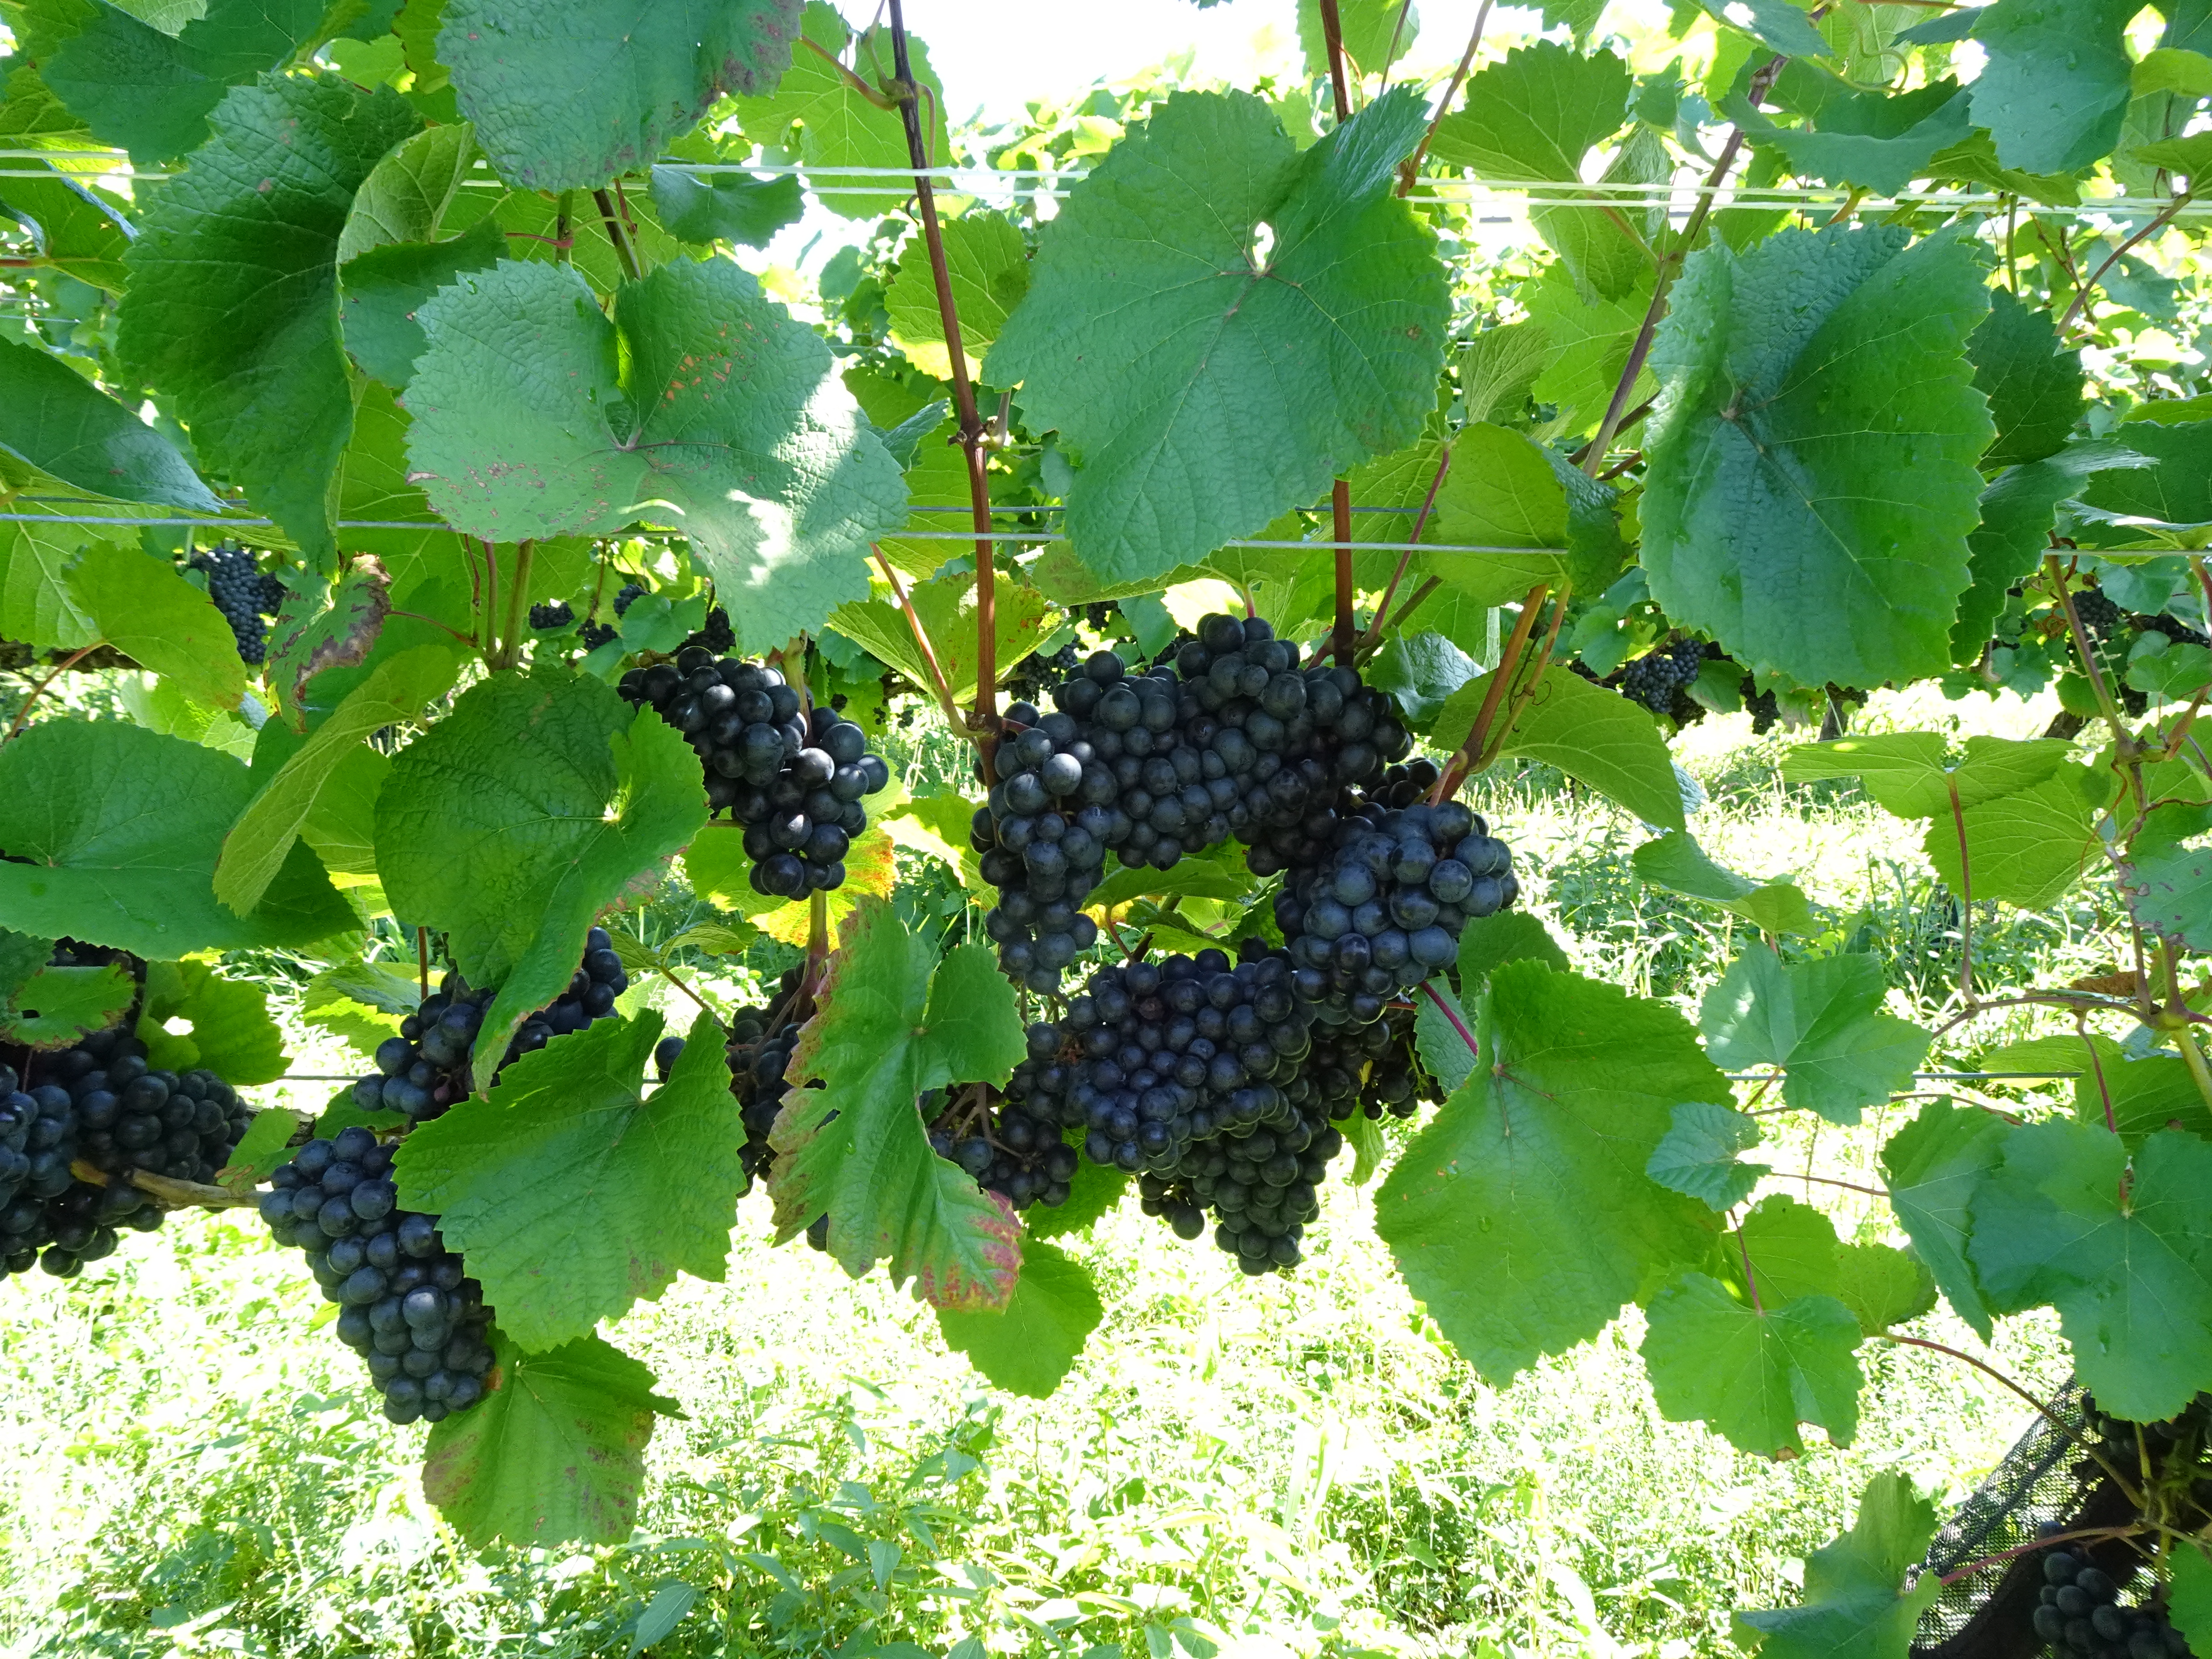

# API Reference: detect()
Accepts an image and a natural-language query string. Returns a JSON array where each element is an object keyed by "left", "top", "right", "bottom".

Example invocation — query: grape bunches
[
  {"left": 0, "top": 958, "right": 148, "bottom": 1107},
  {"left": 41, "top": 1057, "right": 258, "bottom": 1279},
  {"left": 1138, "top": 1169, "right": 1216, "bottom": 1240},
  {"left": 731, "top": 707, "right": 888, "bottom": 900},
  {"left": 757, "top": 1023, "right": 806, "bottom": 1180},
  {"left": 1160, "top": 938, "right": 1315, "bottom": 1138},
  {"left": 2033, "top": 1520, "right": 2206, "bottom": 1659},
  {"left": 0, "top": 1065, "right": 82, "bottom": 1231},
  {"left": 969, "top": 700, "right": 1118, "bottom": 996},
  {"left": 654, "top": 1006, "right": 769, "bottom": 1197},
  {"left": 926, "top": 1081, "right": 1078, "bottom": 1207},
  {"left": 1290, "top": 800, "right": 1517, "bottom": 1026},
  {"left": 1067, "top": 963, "right": 1206, "bottom": 1178},
  {"left": 615, "top": 645, "right": 807, "bottom": 818},
  {"left": 807, "top": 1210, "right": 830, "bottom": 1251},
  {"left": 0, "top": 1213, "right": 53, "bottom": 1280},
  {"left": 1179, "top": 1075, "right": 1341, "bottom": 1275},
  {"left": 1052, "top": 651, "right": 1185, "bottom": 871},
  {"left": 1232, "top": 667, "right": 1412, "bottom": 877},
  {"left": 259, "top": 1127, "right": 495, "bottom": 1423},
  {"left": 1005, "top": 1022, "right": 1085, "bottom": 1130},
  {"left": 1308, "top": 1018, "right": 1390, "bottom": 1120},
  {"left": 1360, "top": 1017, "right": 1447, "bottom": 1119},
  {"left": 437, "top": 926, "right": 628, "bottom": 1092},
  {"left": 1171, "top": 613, "right": 1306, "bottom": 855},
  {"left": 2079, "top": 1388, "right": 2201, "bottom": 1462},
  {"left": 768, "top": 961, "right": 827, "bottom": 1024},
  {"left": 355, "top": 966, "right": 461, "bottom": 1121},
  {"left": 1273, "top": 757, "right": 1441, "bottom": 950}
]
